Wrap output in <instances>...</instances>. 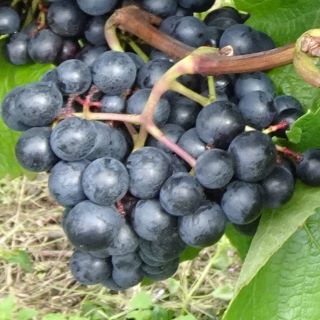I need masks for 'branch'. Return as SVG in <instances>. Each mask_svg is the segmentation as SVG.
Here are the masks:
<instances>
[{
	"instance_id": "branch-1",
	"label": "branch",
	"mask_w": 320,
	"mask_h": 320,
	"mask_svg": "<svg viewBox=\"0 0 320 320\" xmlns=\"http://www.w3.org/2000/svg\"><path fill=\"white\" fill-rule=\"evenodd\" d=\"M162 20L142 8H120L108 17L103 27L105 41L111 50L124 52L116 38L115 27L118 23L121 28L135 32L145 42L178 61L187 56L194 58L196 67L192 74L199 73L204 77L222 73L265 71L293 63L296 44L238 56L206 54L161 32L152 25L154 23L160 25Z\"/></svg>"
}]
</instances>
